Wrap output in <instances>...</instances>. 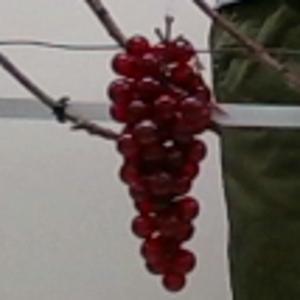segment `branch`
Segmentation results:
<instances>
[{
	"label": "branch",
	"mask_w": 300,
	"mask_h": 300,
	"mask_svg": "<svg viewBox=\"0 0 300 300\" xmlns=\"http://www.w3.org/2000/svg\"><path fill=\"white\" fill-rule=\"evenodd\" d=\"M0 67L19 84L24 90L28 91L42 105L47 107L51 112L50 116L53 117L58 125H66L70 122L72 125L69 127L70 132H85L87 136H96L106 141L117 142L120 133H116L112 128H105L97 123L83 118L82 115L73 110L71 101L72 98L68 95H62L60 99H53L49 94L45 93L37 84L32 82L24 73L13 64L8 57L0 50Z\"/></svg>",
	"instance_id": "obj_1"
},
{
	"label": "branch",
	"mask_w": 300,
	"mask_h": 300,
	"mask_svg": "<svg viewBox=\"0 0 300 300\" xmlns=\"http://www.w3.org/2000/svg\"><path fill=\"white\" fill-rule=\"evenodd\" d=\"M225 31L252 59L267 71L300 105V81L279 61L269 56L243 31L215 11L206 0H189Z\"/></svg>",
	"instance_id": "obj_2"
},
{
	"label": "branch",
	"mask_w": 300,
	"mask_h": 300,
	"mask_svg": "<svg viewBox=\"0 0 300 300\" xmlns=\"http://www.w3.org/2000/svg\"><path fill=\"white\" fill-rule=\"evenodd\" d=\"M89 11L95 16L101 28L124 51V45L128 37L119 28L116 20L111 15L103 0H82Z\"/></svg>",
	"instance_id": "obj_3"
},
{
	"label": "branch",
	"mask_w": 300,
	"mask_h": 300,
	"mask_svg": "<svg viewBox=\"0 0 300 300\" xmlns=\"http://www.w3.org/2000/svg\"><path fill=\"white\" fill-rule=\"evenodd\" d=\"M206 132H208L211 135H213L217 138H220V139L225 138V132H224L223 124H221L218 121L213 120L212 118H211V125H210L209 129Z\"/></svg>",
	"instance_id": "obj_4"
}]
</instances>
